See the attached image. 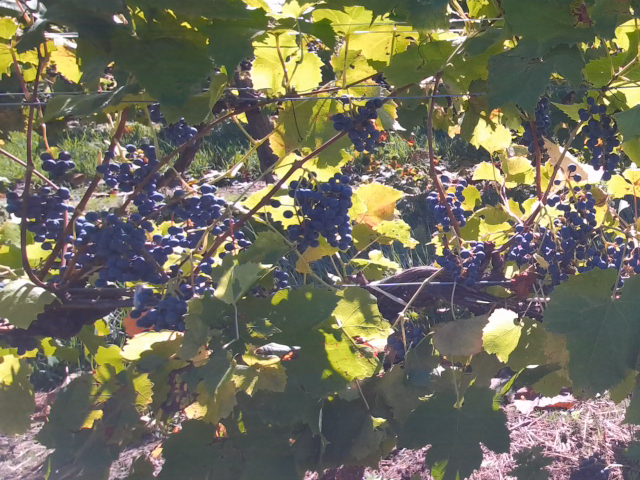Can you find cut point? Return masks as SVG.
Wrapping results in <instances>:
<instances>
[{
    "mask_svg": "<svg viewBox=\"0 0 640 480\" xmlns=\"http://www.w3.org/2000/svg\"><path fill=\"white\" fill-rule=\"evenodd\" d=\"M543 209L545 210L544 214H542L540 217L537 218V221H541L542 219H544L546 216L548 217L550 223H554L553 218L551 217V214L549 213V209L544 205Z\"/></svg>",
    "mask_w": 640,
    "mask_h": 480,
    "instance_id": "cut-point-3",
    "label": "cut point"
},
{
    "mask_svg": "<svg viewBox=\"0 0 640 480\" xmlns=\"http://www.w3.org/2000/svg\"><path fill=\"white\" fill-rule=\"evenodd\" d=\"M559 170H560L561 174L563 175V177L565 179V182L567 183V186H571V183H570V181H569V179L567 177V174L565 173L563 167L560 166Z\"/></svg>",
    "mask_w": 640,
    "mask_h": 480,
    "instance_id": "cut-point-6",
    "label": "cut point"
},
{
    "mask_svg": "<svg viewBox=\"0 0 640 480\" xmlns=\"http://www.w3.org/2000/svg\"><path fill=\"white\" fill-rule=\"evenodd\" d=\"M117 147L119 150L120 160L124 161L125 160L124 147L120 141H118Z\"/></svg>",
    "mask_w": 640,
    "mask_h": 480,
    "instance_id": "cut-point-5",
    "label": "cut point"
},
{
    "mask_svg": "<svg viewBox=\"0 0 640 480\" xmlns=\"http://www.w3.org/2000/svg\"><path fill=\"white\" fill-rule=\"evenodd\" d=\"M450 229H451L452 234H453L454 236H452L450 239H448V242H452V241H454V240L456 239V247H459V240H460V241H462V242H465V239H464V238H462V237H457V236H456V232H455V230H454V227H453V226H450Z\"/></svg>",
    "mask_w": 640,
    "mask_h": 480,
    "instance_id": "cut-point-1",
    "label": "cut point"
},
{
    "mask_svg": "<svg viewBox=\"0 0 640 480\" xmlns=\"http://www.w3.org/2000/svg\"><path fill=\"white\" fill-rule=\"evenodd\" d=\"M77 212H78V214H76V217H75V219H74V221L72 223V234H75V226H76L77 221H78L79 217L81 216V214L82 215H86L85 210L77 209Z\"/></svg>",
    "mask_w": 640,
    "mask_h": 480,
    "instance_id": "cut-point-2",
    "label": "cut point"
},
{
    "mask_svg": "<svg viewBox=\"0 0 640 480\" xmlns=\"http://www.w3.org/2000/svg\"><path fill=\"white\" fill-rule=\"evenodd\" d=\"M299 169L303 170V172H302V174L300 176V179H303L305 177V175H306V172H307L308 175H310V177L312 178V180L317 181V178L311 173L310 169H308V168H306L304 166H301Z\"/></svg>",
    "mask_w": 640,
    "mask_h": 480,
    "instance_id": "cut-point-4",
    "label": "cut point"
}]
</instances>
